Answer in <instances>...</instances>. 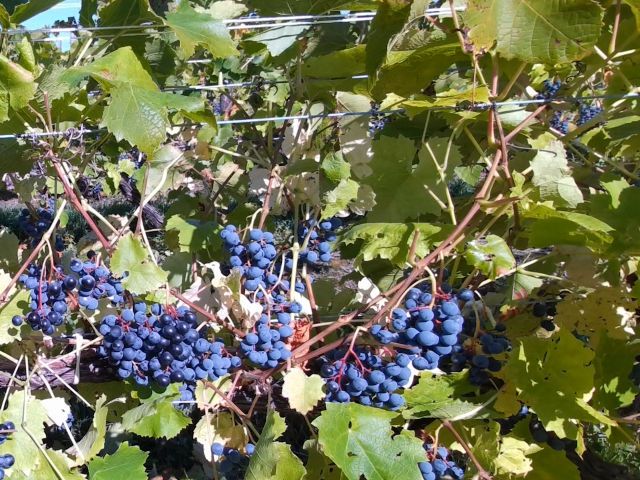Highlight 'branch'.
<instances>
[{"label":"branch","mask_w":640,"mask_h":480,"mask_svg":"<svg viewBox=\"0 0 640 480\" xmlns=\"http://www.w3.org/2000/svg\"><path fill=\"white\" fill-rule=\"evenodd\" d=\"M548 109V105L546 103H543L542 105L538 106L537 108L533 109L525 118L521 123H518L515 127H513L510 131H508L507 133L503 134L498 141L495 143L496 146V152H495V156H494V161L492 164V167L487 175V177L485 178L481 189L478 193V196L475 200V203L472 205V209L469 210L461 219V221L458 223L457 226H455L450 233L441 241L439 242L433 249L432 251L429 253V255L419 264H417L414 269L411 271L410 275L408 277H406L405 279L401 280L400 282L392 285L391 287H389L387 290L381 292L378 296L374 297L372 300L368 301L367 303L363 304L362 306H360L359 308L354 309L352 312L348 313L347 315H345L344 317H342L341 319H339L338 321L332 323L331 325H329L326 329L323 330V328L321 326H318L316 328V334L315 336H313L309 341L307 342H302L299 345H297L295 348H293L291 350V353L293 355H298L302 350L305 349H309L312 348L316 343L319 342L320 347L311 350L310 352L299 356L298 358L292 359L290 362L283 364L279 367H275L272 369H269L267 371H264L262 374H260L258 376V379L260 381H264L269 377L281 374L283 372H286L292 368H294L297 365H300L306 361L311 360L312 358L319 356L321 354L327 353L349 341H351L353 339V335L354 332L348 333L342 337H340L339 339L327 344L325 337H327L329 334H331L334 330L340 328L341 326H343L344 324L350 322L352 319H354L356 316L361 315L362 313H364L365 311L371 309L372 307H374L375 305H377L378 303H380L382 300L386 299L387 297H389L391 294H393L394 292H396V294L391 297L382 307V309L380 310V312L367 324L365 325L363 328H361L357 334V338H361L363 337L365 334H367L368 332H370V327L372 325H377L383 318L384 316L388 313V311L390 310V308L397 303L403 296V294L405 293V291L407 290V288L412 284V282L417 278L418 274L420 273L421 270H423L424 268H426L431 261L437 256V254L444 248L446 247L453 239L456 235H458L460 233V231H462L464 229V227H466L468 225V221L475 216L478 211L479 208L481 207L485 195L489 189V186L492 182V180L494 179L500 163H501V158H502V154H503V149L505 146V141L510 140L511 138H513L518 132H520L521 130H523L525 127H527L536 116H538L539 114H541L542 112L546 111Z\"/></svg>","instance_id":"1"},{"label":"branch","mask_w":640,"mask_h":480,"mask_svg":"<svg viewBox=\"0 0 640 480\" xmlns=\"http://www.w3.org/2000/svg\"><path fill=\"white\" fill-rule=\"evenodd\" d=\"M48 158H49V160L51 162V166L54 168L56 174L60 178V180H61V182H62V184H63V186H64V188L66 190V193H65L62 201L60 202L59 207L57 208L56 213H55V215L53 217V220L51 221V223L49 225V228L46 230V232L43 235L42 239L26 255V257L24 258V260L22 261V263L18 267L17 271L12 276V278L8 282V284L5 287V289L3 290V292L0 294V305H2L4 303V301H5V299L9 296V294L12 291V289L15 287L17 281L21 278V276L25 272V269L27 268V266L29 265L31 260L35 256H37L39 254V252L47 245L49 239L52 237V234L56 230V227L58 226V223L60 222V219H61V217H62V215H63V213H64V211L66 209V206L69 203L70 199L76 205V208L78 209V212L80 213V216L85 221V224L91 230L93 236L95 237V239L98 242L99 246L101 247L102 251L106 255H110L112 253V250L108 247L105 239L102 237V235L100 234L98 228L96 227V225L92 221L91 217L88 215L87 211L85 210V207L83 206V203L81 202L79 197L74 192V190H73V188H72L67 176L63 172L61 166L58 164V160H57L55 154L53 152H50L48 154Z\"/></svg>","instance_id":"2"},{"label":"branch","mask_w":640,"mask_h":480,"mask_svg":"<svg viewBox=\"0 0 640 480\" xmlns=\"http://www.w3.org/2000/svg\"><path fill=\"white\" fill-rule=\"evenodd\" d=\"M288 130H289V123L283 122L282 128L280 130V134L278 137V141L276 143V146L274 147V150L270 158V169H269V174L267 179L266 192H265V197L261 207L260 216L258 219V227L260 229H263L265 227V222L268 215V209H269L270 202L272 199V194H273L275 176H276L277 168L279 167V163L277 162V160L281 152V149L283 148V145L285 143Z\"/></svg>","instance_id":"3"},{"label":"branch","mask_w":640,"mask_h":480,"mask_svg":"<svg viewBox=\"0 0 640 480\" xmlns=\"http://www.w3.org/2000/svg\"><path fill=\"white\" fill-rule=\"evenodd\" d=\"M301 197L300 192L294 194V213H293V255L288 281V300H295V283L298 273L299 257H300V215H301Z\"/></svg>","instance_id":"4"},{"label":"branch","mask_w":640,"mask_h":480,"mask_svg":"<svg viewBox=\"0 0 640 480\" xmlns=\"http://www.w3.org/2000/svg\"><path fill=\"white\" fill-rule=\"evenodd\" d=\"M163 287L172 294V297L175 300L181 299L189 308L195 310L196 312L201 314L204 318L208 319L209 321L215 323L216 325H218V326H220L222 328H225L226 330L230 331L232 334H234V335H236V336H238L240 338H244L246 336V333L244 331H242L241 329H239L237 327H234L229 322L224 321L221 318H219V317L213 315L212 313L206 311L203 307H201L197 303L193 302L185 293H183L178 288H176L173 285H171L169 282H165L163 284Z\"/></svg>","instance_id":"5"},{"label":"branch","mask_w":640,"mask_h":480,"mask_svg":"<svg viewBox=\"0 0 640 480\" xmlns=\"http://www.w3.org/2000/svg\"><path fill=\"white\" fill-rule=\"evenodd\" d=\"M200 383L202 385H206L207 387H210L215 394L219 397V399L221 401H223L230 409H232L233 411L236 412V414L238 415L239 420L241 421V423L248 429V431L250 432V434L252 436H255L257 434V430L255 429V427L248 421V419L245 416V413L243 412V410L234 402H232L225 394L224 392L221 390V388L214 383L212 380L208 379V378H202L200 380Z\"/></svg>","instance_id":"6"},{"label":"branch","mask_w":640,"mask_h":480,"mask_svg":"<svg viewBox=\"0 0 640 480\" xmlns=\"http://www.w3.org/2000/svg\"><path fill=\"white\" fill-rule=\"evenodd\" d=\"M442 423L444 425H446V427L448 428L449 432L457 440V442L459 444H461L465 448L466 452L469 454V457H470L471 461L476 466V469L480 473L481 477L483 479H486L488 477V472L484 469L483 463L477 457L476 452L472 448L470 443L461 436V434L457 431V429L455 428L453 422L449 418H444L442 420Z\"/></svg>","instance_id":"7"},{"label":"branch","mask_w":640,"mask_h":480,"mask_svg":"<svg viewBox=\"0 0 640 480\" xmlns=\"http://www.w3.org/2000/svg\"><path fill=\"white\" fill-rule=\"evenodd\" d=\"M304 280H305V290H306L307 297H308L309 309H310V312H311L312 322L314 324H318L320 322V319H319L318 309L316 307V300H315L314 291H313V288H312V278H311V276L309 274H306L304 276Z\"/></svg>","instance_id":"8"},{"label":"branch","mask_w":640,"mask_h":480,"mask_svg":"<svg viewBox=\"0 0 640 480\" xmlns=\"http://www.w3.org/2000/svg\"><path fill=\"white\" fill-rule=\"evenodd\" d=\"M297 100H298V95L296 93H293L291 95L289 105H288L287 109L284 112L285 116H291L292 115V113L294 112V109L296 108Z\"/></svg>","instance_id":"9"}]
</instances>
